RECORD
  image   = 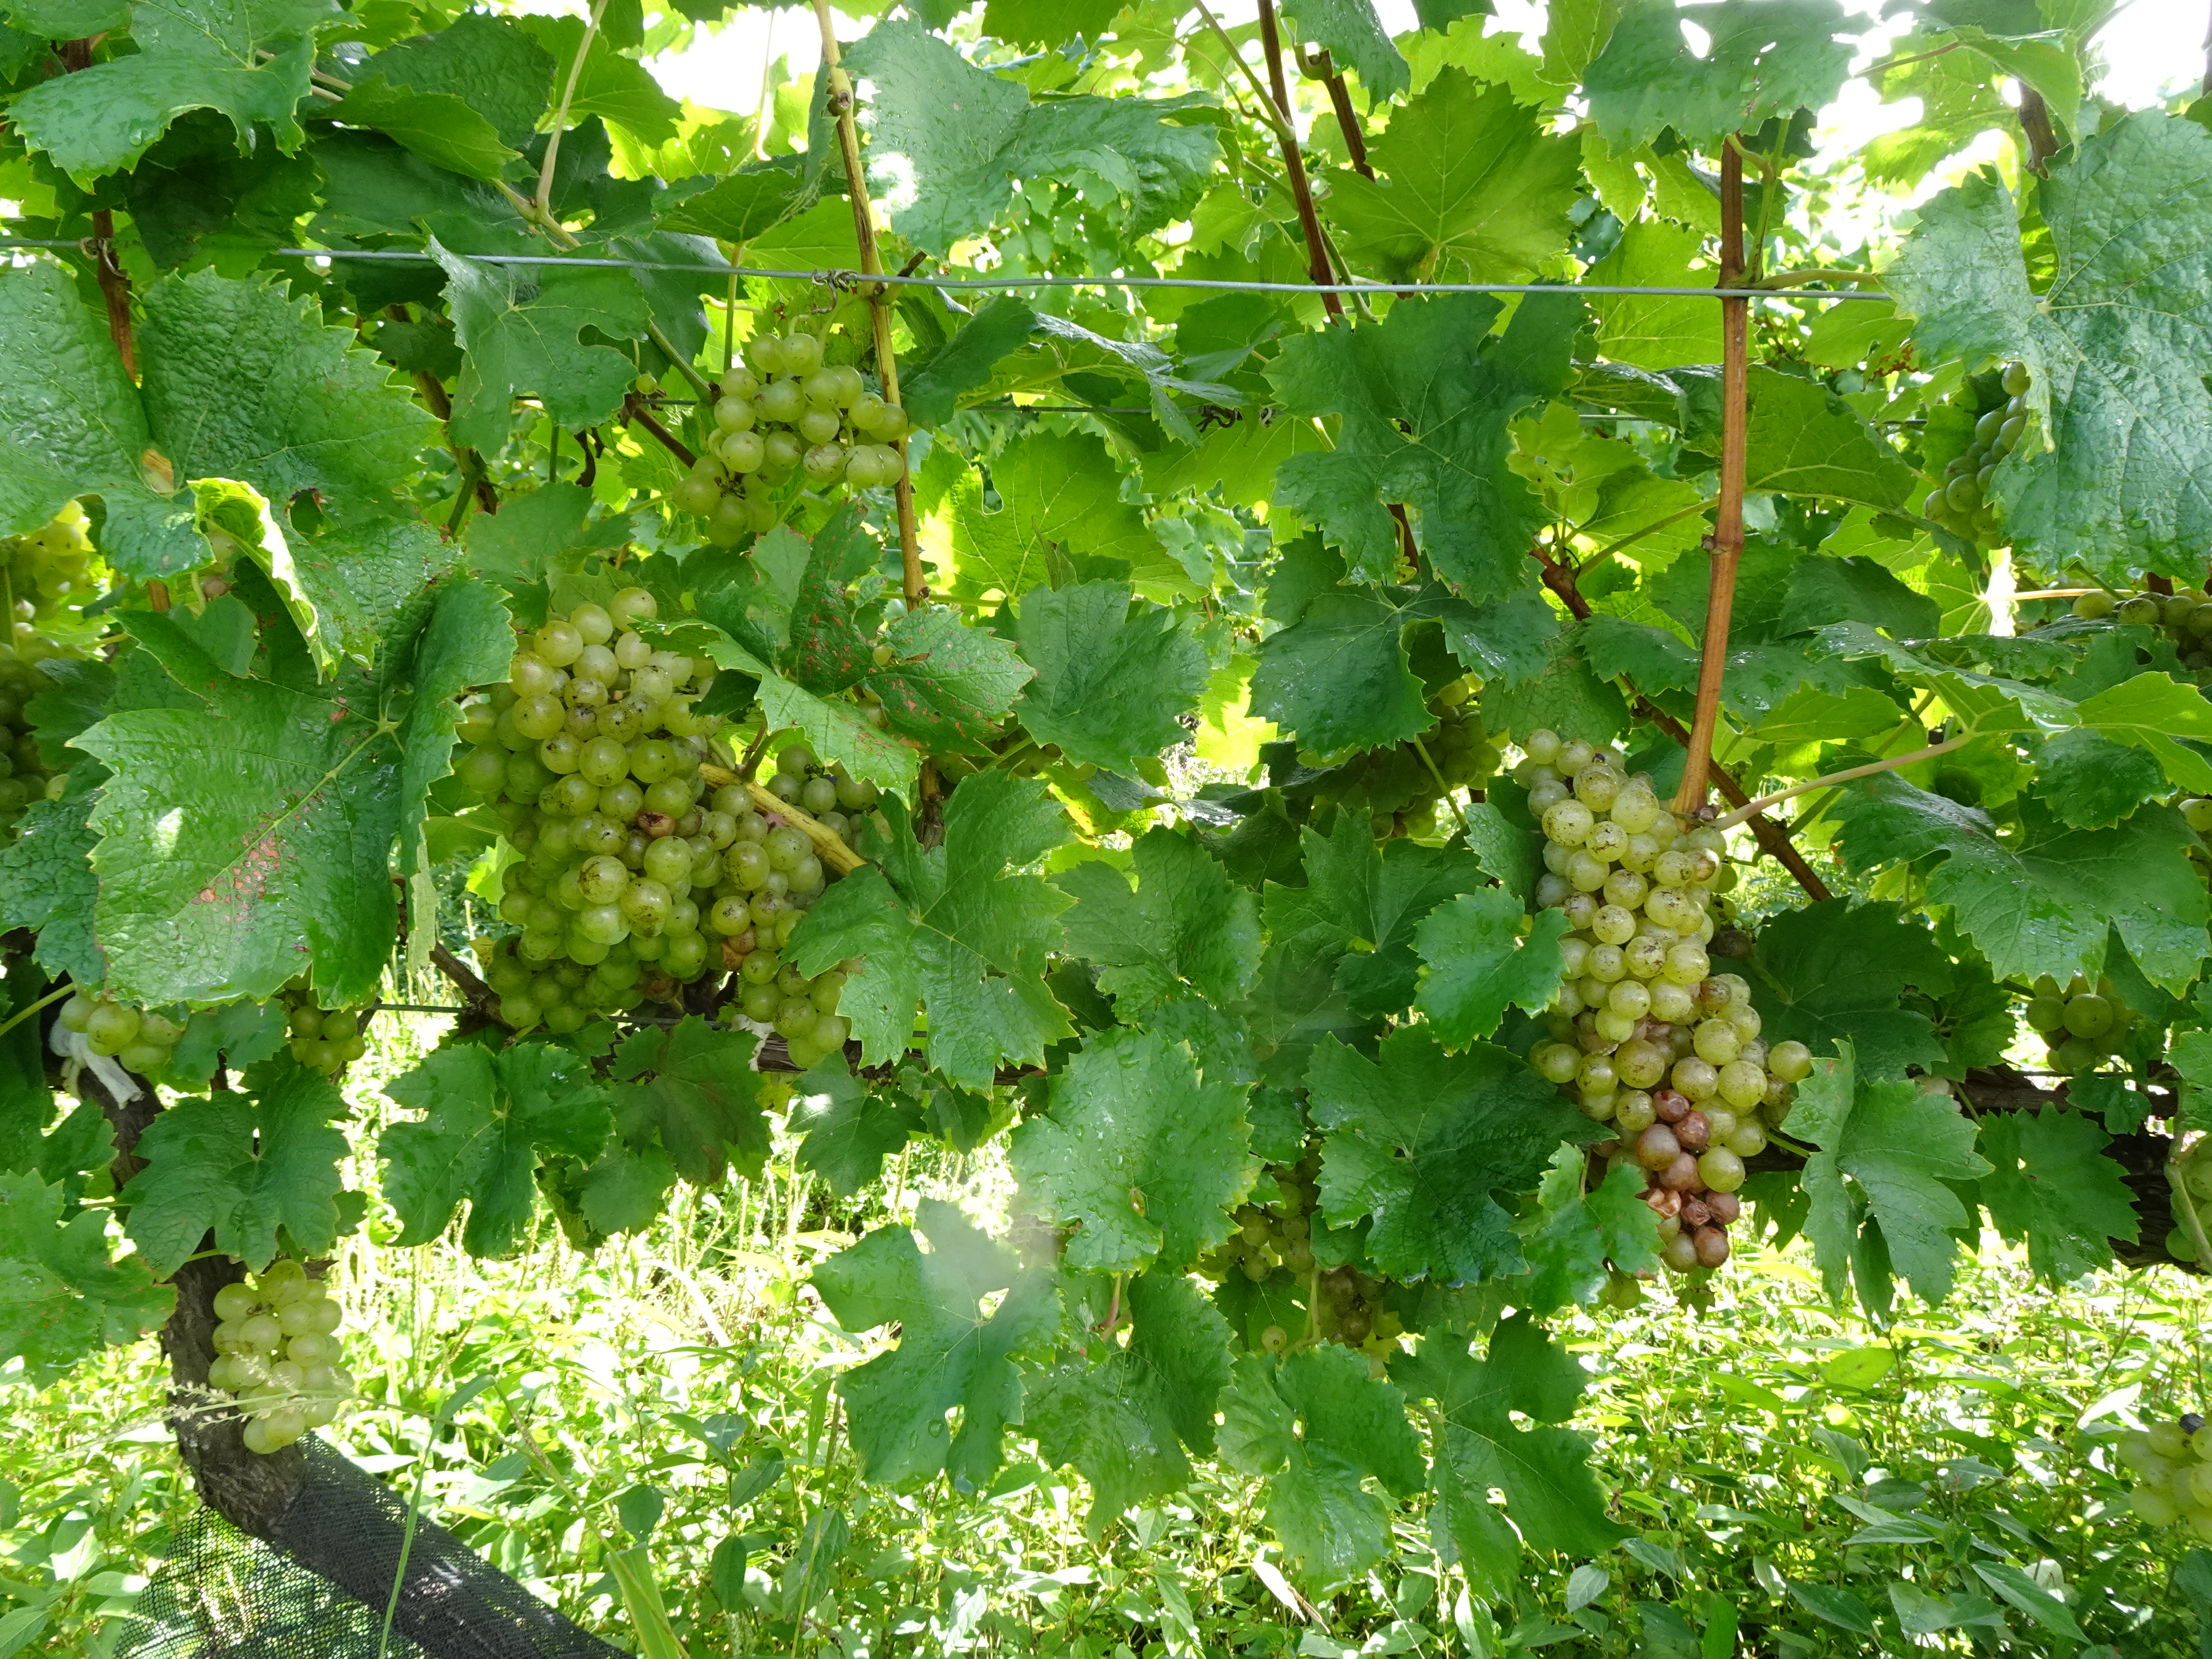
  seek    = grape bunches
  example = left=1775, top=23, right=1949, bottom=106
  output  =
left=2072, top=586, right=2212, bottom=831
left=857, top=630, right=893, bottom=727
left=209, top=1258, right=354, bottom=1453
left=488, top=930, right=650, bottom=1032
left=2117, top=1420, right=2212, bottom=1543
left=673, top=329, right=908, bottom=550
left=511, top=587, right=713, bottom=983
left=58, top=993, right=183, bottom=1074
left=929, top=725, right=1097, bottom=786
left=1267, top=1147, right=1380, bottom=1337
left=1192, top=1181, right=1314, bottom=1283
left=765, top=743, right=878, bottom=854
left=687, top=785, right=886, bottom=1074
left=2166, top=1133, right=2212, bottom=1260
left=1925, top=361, right=2030, bottom=548
left=1528, top=972, right=1810, bottom=1308
left=454, top=681, right=622, bottom=963
left=1363, top=1298, right=1408, bottom=1380
left=1512, top=729, right=1749, bottom=1046
left=197, top=512, right=233, bottom=597
left=1369, top=671, right=1512, bottom=848
left=1262, top=1323, right=1307, bottom=1361
left=272, top=964, right=366, bottom=1075
left=2026, top=971, right=2135, bottom=1072
left=0, top=496, right=98, bottom=838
